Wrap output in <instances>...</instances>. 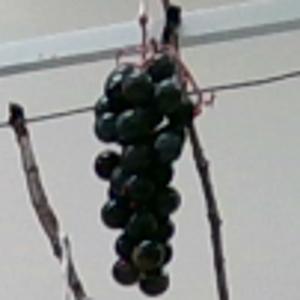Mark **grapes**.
<instances>
[{"instance_id":"obj_1","label":"grapes","mask_w":300,"mask_h":300,"mask_svg":"<svg viewBox=\"0 0 300 300\" xmlns=\"http://www.w3.org/2000/svg\"><path fill=\"white\" fill-rule=\"evenodd\" d=\"M181 69L180 58L168 50L143 65L126 60L110 72L105 94L94 106L95 137L122 146L121 153L105 149L93 161L95 176L110 183L100 220L109 229L123 230L115 240L120 260L112 275L122 287L139 286L148 299L172 284L164 269L174 255L167 240L176 225L169 216L182 196L168 184L186 142V125L197 113L195 102L183 94Z\"/></svg>"}]
</instances>
